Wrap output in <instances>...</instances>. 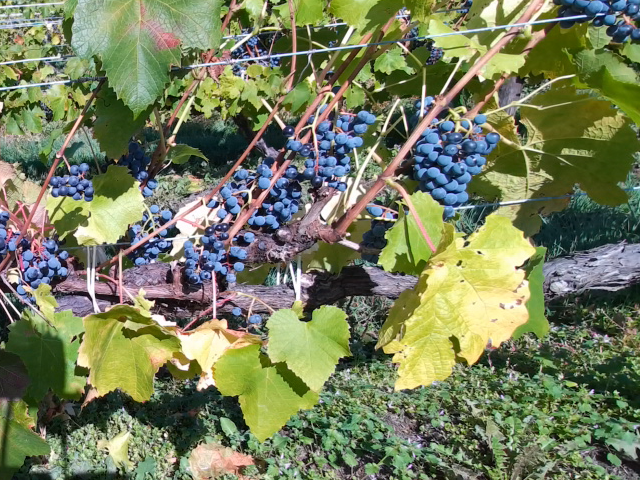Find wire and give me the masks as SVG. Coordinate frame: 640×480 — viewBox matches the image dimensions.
Returning a JSON list of instances; mask_svg holds the SVG:
<instances>
[{
    "label": "wire",
    "mask_w": 640,
    "mask_h": 480,
    "mask_svg": "<svg viewBox=\"0 0 640 480\" xmlns=\"http://www.w3.org/2000/svg\"><path fill=\"white\" fill-rule=\"evenodd\" d=\"M73 57H74L73 53H60L55 55L37 56V57H22V58H15L12 60L0 61V67L7 66V65H14L18 63H24V62L50 61V60L73 58Z\"/></svg>",
    "instance_id": "wire-4"
},
{
    "label": "wire",
    "mask_w": 640,
    "mask_h": 480,
    "mask_svg": "<svg viewBox=\"0 0 640 480\" xmlns=\"http://www.w3.org/2000/svg\"><path fill=\"white\" fill-rule=\"evenodd\" d=\"M103 75H92L87 77H77V78H69V79H58L50 82H36V83H26L20 84L18 86H0V91H20L28 88H38V87H52L60 84H71V83H80V82H89L94 80H103Z\"/></svg>",
    "instance_id": "wire-3"
},
{
    "label": "wire",
    "mask_w": 640,
    "mask_h": 480,
    "mask_svg": "<svg viewBox=\"0 0 640 480\" xmlns=\"http://www.w3.org/2000/svg\"><path fill=\"white\" fill-rule=\"evenodd\" d=\"M587 194L586 190L575 191L571 193H559V194H551V195H540L536 197H525L519 199H510V200H494L489 202H480L475 204H466V205H456V210H469V209H477L482 207H491L497 205H512V204H521L527 202H538L543 200H553V199H562V198H573L578 196H585Z\"/></svg>",
    "instance_id": "wire-2"
},
{
    "label": "wire",
    "mask_w": 640,
    "mask_h": 480,
    "mask_svg": "<svg viewBox=\"0 0 640 480\" xmlns=\"http://www.w3.org/2000/svg\"><path fill=\"white\" fill-rule=\"evenodd\" d=\"M246 36H247V33H246V32L237 33V34H229V35L223 34V35H222V39H223V40H231V39L244 38V37H246Z\"/></svg>",
    "instance_id": "wire-5"
},
{
    "label": "wire",
    "mask_w": 640,
    "mask_h": 480,
    "mask_svg": "<svg viewBox=\"0 0 640 480\" xmlns=\"http://www.w3.org/2000/svg\"><path fill=\"white\" fill-rule=\"evenodd\" d=\"M587 18H588L587 14H579V15H573V16H559V17L544 18V19L534 20V21H526L521 23H506L498 26H487L484 28L470 29V30H441V31L429 32V33H417L413 36H400L397 38L379 40L375 43L374 42L356 43V44L345 45V46L322 47L314 50L281 51V52H273L269 54L255 55L251 57L235 58V59H229V60L183 62L181 64L171 65L169 67V70L174 71L177 69H183L185 67L231 65V64L253 62L257 60H265V59H271V58L283 57V56L316 55L324 52L347 51V50H353L358 48H373L374 46L379 47L382 45L399 43L402 41H415L420 38H431V37H438L443 35H472V34L486 33L489 31H500L508 28H523V27L536 26V25H542L547 23H554V22H561V21H575V20H582Z\"/></svg>",
    "instance_id": "wire-1"
}]
</instances>
